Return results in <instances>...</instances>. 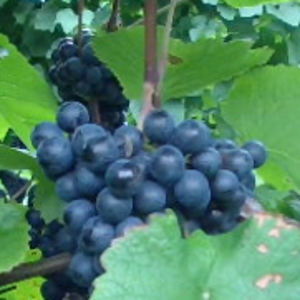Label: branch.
Here are the masks:
<instances>
[{"mask_svg":"<svg viewBox=\"0 0 300 300\" xmlns=\"http://www.w3.org/2000/svg\"><path fill=\"white\" fill-rule=\"evenodd\" d=\"M182 0H169L166 3L168 15L164 27V37L162 41V53L157 62V0H144V71L142 83L150 82L154 87L151 102L154 109H161L162 103L160 100V86L161 80L165 73L167 62V46L171 34L174 11L177 4Z\"/></svg>","mask_w":300,"mask_h":300,"instance_id":"obj_1","label":"branch"}]
</instances>
